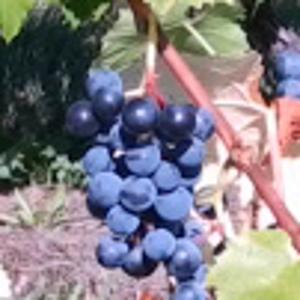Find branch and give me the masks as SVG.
<instances>
[{
    "label": "branch",
    "mask_w": 300,
    "mask_h": 300,
    "mask_svg": "<svg viewBox=\"0 0 300 300\" xmlns=\"http://www.w3.org/2000/svg\"><path fill=\"white\" fill-rule=\"evenodd\" d=\"M124 6L134 15L146 38L149 34L156 36L157 52L170 69L180 88L192 99L195 107L211 111L215 115L220 140L242 169L252 188L271 212L274 221L282 229L287 239L293 243L300 242L299 222L290 213L284 199L264 174L244 141L218 110L215 101L209 96L205 87L193 75L181 53L152 15L146 1L124 0Z\"/></svg>",
    "instance_id": "1"
}]
</instances>
